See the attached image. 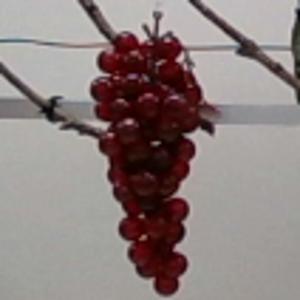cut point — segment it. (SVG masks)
<instances>
[{
	"mask_svg": "<svg viewBox=\"0 0 300 300\" xmlns=\"http://www.w3.org/2000/svg\"><path fill=\"white\" fill-rule=\"evenodd\" d=\"M153 19V38L160 37V24L166 19V11L164 9V0H155V6L152 8Z\"/></svg>",
	"mask_w": 300,
	"mask_h": 300,
	"instance_id": "obj_1",
	"label": "cut point"
}]
</instances>
